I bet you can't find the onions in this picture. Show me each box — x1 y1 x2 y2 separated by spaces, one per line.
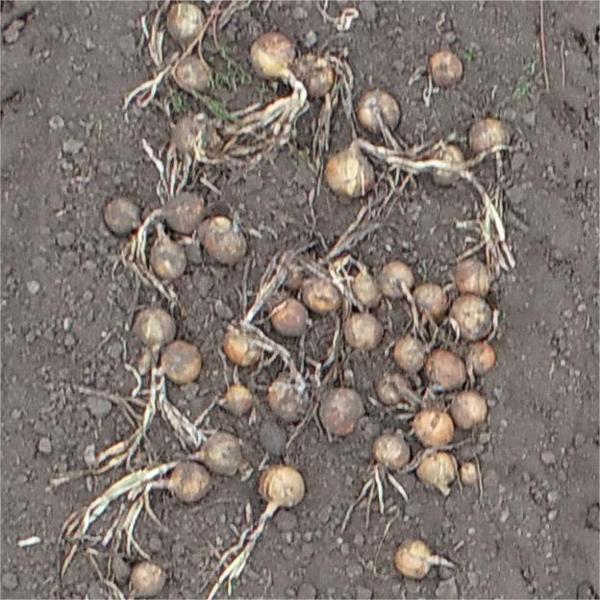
169 461 208 502
172 114 215 153
449 295 493 339
379 260 414 296
425 348 466 389
373 431 412 469
454 258 491 294
348 271 381 304
225 386 253 415
265 374 311 421
165 4 202 42
220 324 261 367
392 336 426 370
394 539 429 577
326 146 373 197
174 55 210 91
432 142 462 186
464 341 496 372
301 276 340 314
344 312 384 348
126 560 165 594
457 460 479 484
314 386 362 434
148 243 185 278
355 89 398 131
468 116 508 157
201 217 245 260
428 50 464 86
131 309 175 347
269 299 309 336
296 58 332 96
412 281 449 318
162 192 201 235
448 390 485 426
259 464 304 506
197 431 244 475
158 340 203 383
416 450 456 488
378 369 417 406
414 407 453 444
102 195 142 234
250 33 292 77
